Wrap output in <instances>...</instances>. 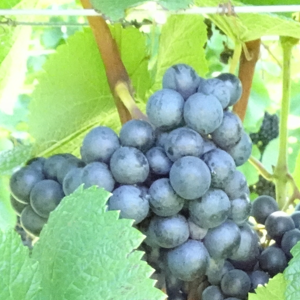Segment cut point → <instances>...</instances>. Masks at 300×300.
<instances>
[{
	"label": "cut point",
	"mask_w": 300,
	"mask_h": 300,
	"mask_svg": "<svg viewBox=\"0 0 300 300\" xmlns=\"http://www.w3.org/2000/svg\"><path fill=\"white\" fill-rule=\"evenodd\" d=\"M115 92L119 95L121 101L126 105L128 111L132 114V119L144 116V112L135 103L127 84L121 80H117L115 84Z\"/></svg>",
	"instance_id": "6a23745f"
}]
</instances>
